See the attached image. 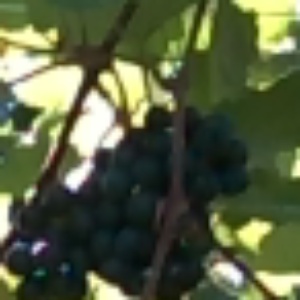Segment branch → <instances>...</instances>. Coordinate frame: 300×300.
I'll use <instances>...</instances> for the list:
<instances>
[{"label":"branch","instance_id":"1","mask_svg":"<svg viewBox=\"0 0 300 300\" xmlns=\"http://www.w3.org/2000/svg\"><path fill=\"white\" fill-rule=\"evenodd\" d=\"M208 4V0H201L198 9L194 13L192 28L187 40L184 67L176 77V108L171 112V122L169 124L172 131V145L167 173V188L165 198L158 202L156 209L157 226L164 229L161 245L156 246L151 252L149 265L143 278L142 300L157 299L162 269L168 261L179 228L186 221L190 212V199L184 188L187 154L184 145V131L178 122V115L185 108L184 97L189 79L188 71L192 62L200 23Z\"/></svg>","mask_w":300,"mask_h":300},{"label":"branch","instance_id":"2","mask_svg":"<svg viewBox=\"0 0 300 300\" xmlns=\"http://www.w3.org/2000/svg\"><path fill=\"white\" fill-rule=\"evenodd\" d=\"M139 4L140 0H125L118 17L107 32L103 44H88L84 46H78L72 53V62L75 64H81L83 67L81 87L76 96V101L71 116L61 135L58 149L53 152L50 163L46 167L43 175L38 179V183L36 185V189L38 191H43L47 187V184L55 179L58 166L64 158L66 152L67 140L69 139L70 133L78 121L86 93L89 87L97 82V70L105 68L112 61L114 57V50L112 46L115 43L116 38L127 26L130 17Z\"/></svg>","mask_w":300,"mask_h":300},{"label":"branch","instance_id":"3","mask_svg":"<svg viewBox=\"0 0 300 300\" xmlns=\"http://www.w3.org/2000/svg\"><path fill=\"white\" fill-rule=\"evenodd\" d=\"M18 234L15 229H12L11 232L4 238L0 243V262L5 260V252L8 247L18 238Z\"/></svg>","mask_w":300,"mask_h":300}]
</instances>
